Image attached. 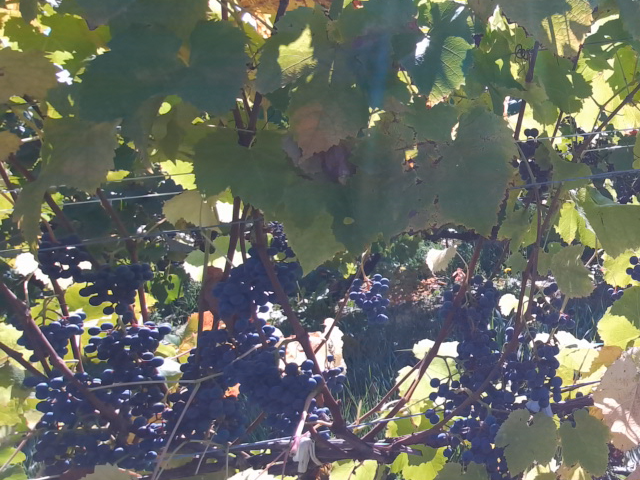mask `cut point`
<instances>
[{"mask_svg":"<svg viewBox=\"0 0 640 480\" xmlns=\"http://www.w3.org/2000/svg\"><path fill=\"white\" fill-rule=\"evenodd\" d=\"M460 392H463V393H467V394H469V395H472V392H471V391H469L467 387L459 388V389L455 390V393H460Z\"/></svg>","mask_w":640,"mask_h":480,"instance_id":"cut-point-2","label":"cut point"},{"mask_svg":"<svg viewBox=\"0 0 640 480\" xmlns=\"http://www.w3.org/2000/svg\"><path fill=\"white\" fill-rule=\"evenodd\" d=\"M56 297H58V294H54V295H50V296H46V297H44V298H43V303H42V308H43V309H42V316H45V312H46V309H47V303H46V301H47V300H49V299H52V298H56Z\"/></svg>","mask_w":640,"mask_h":480,"instance_id":"cut-point-1","label":"cut point"}]
</instances>
